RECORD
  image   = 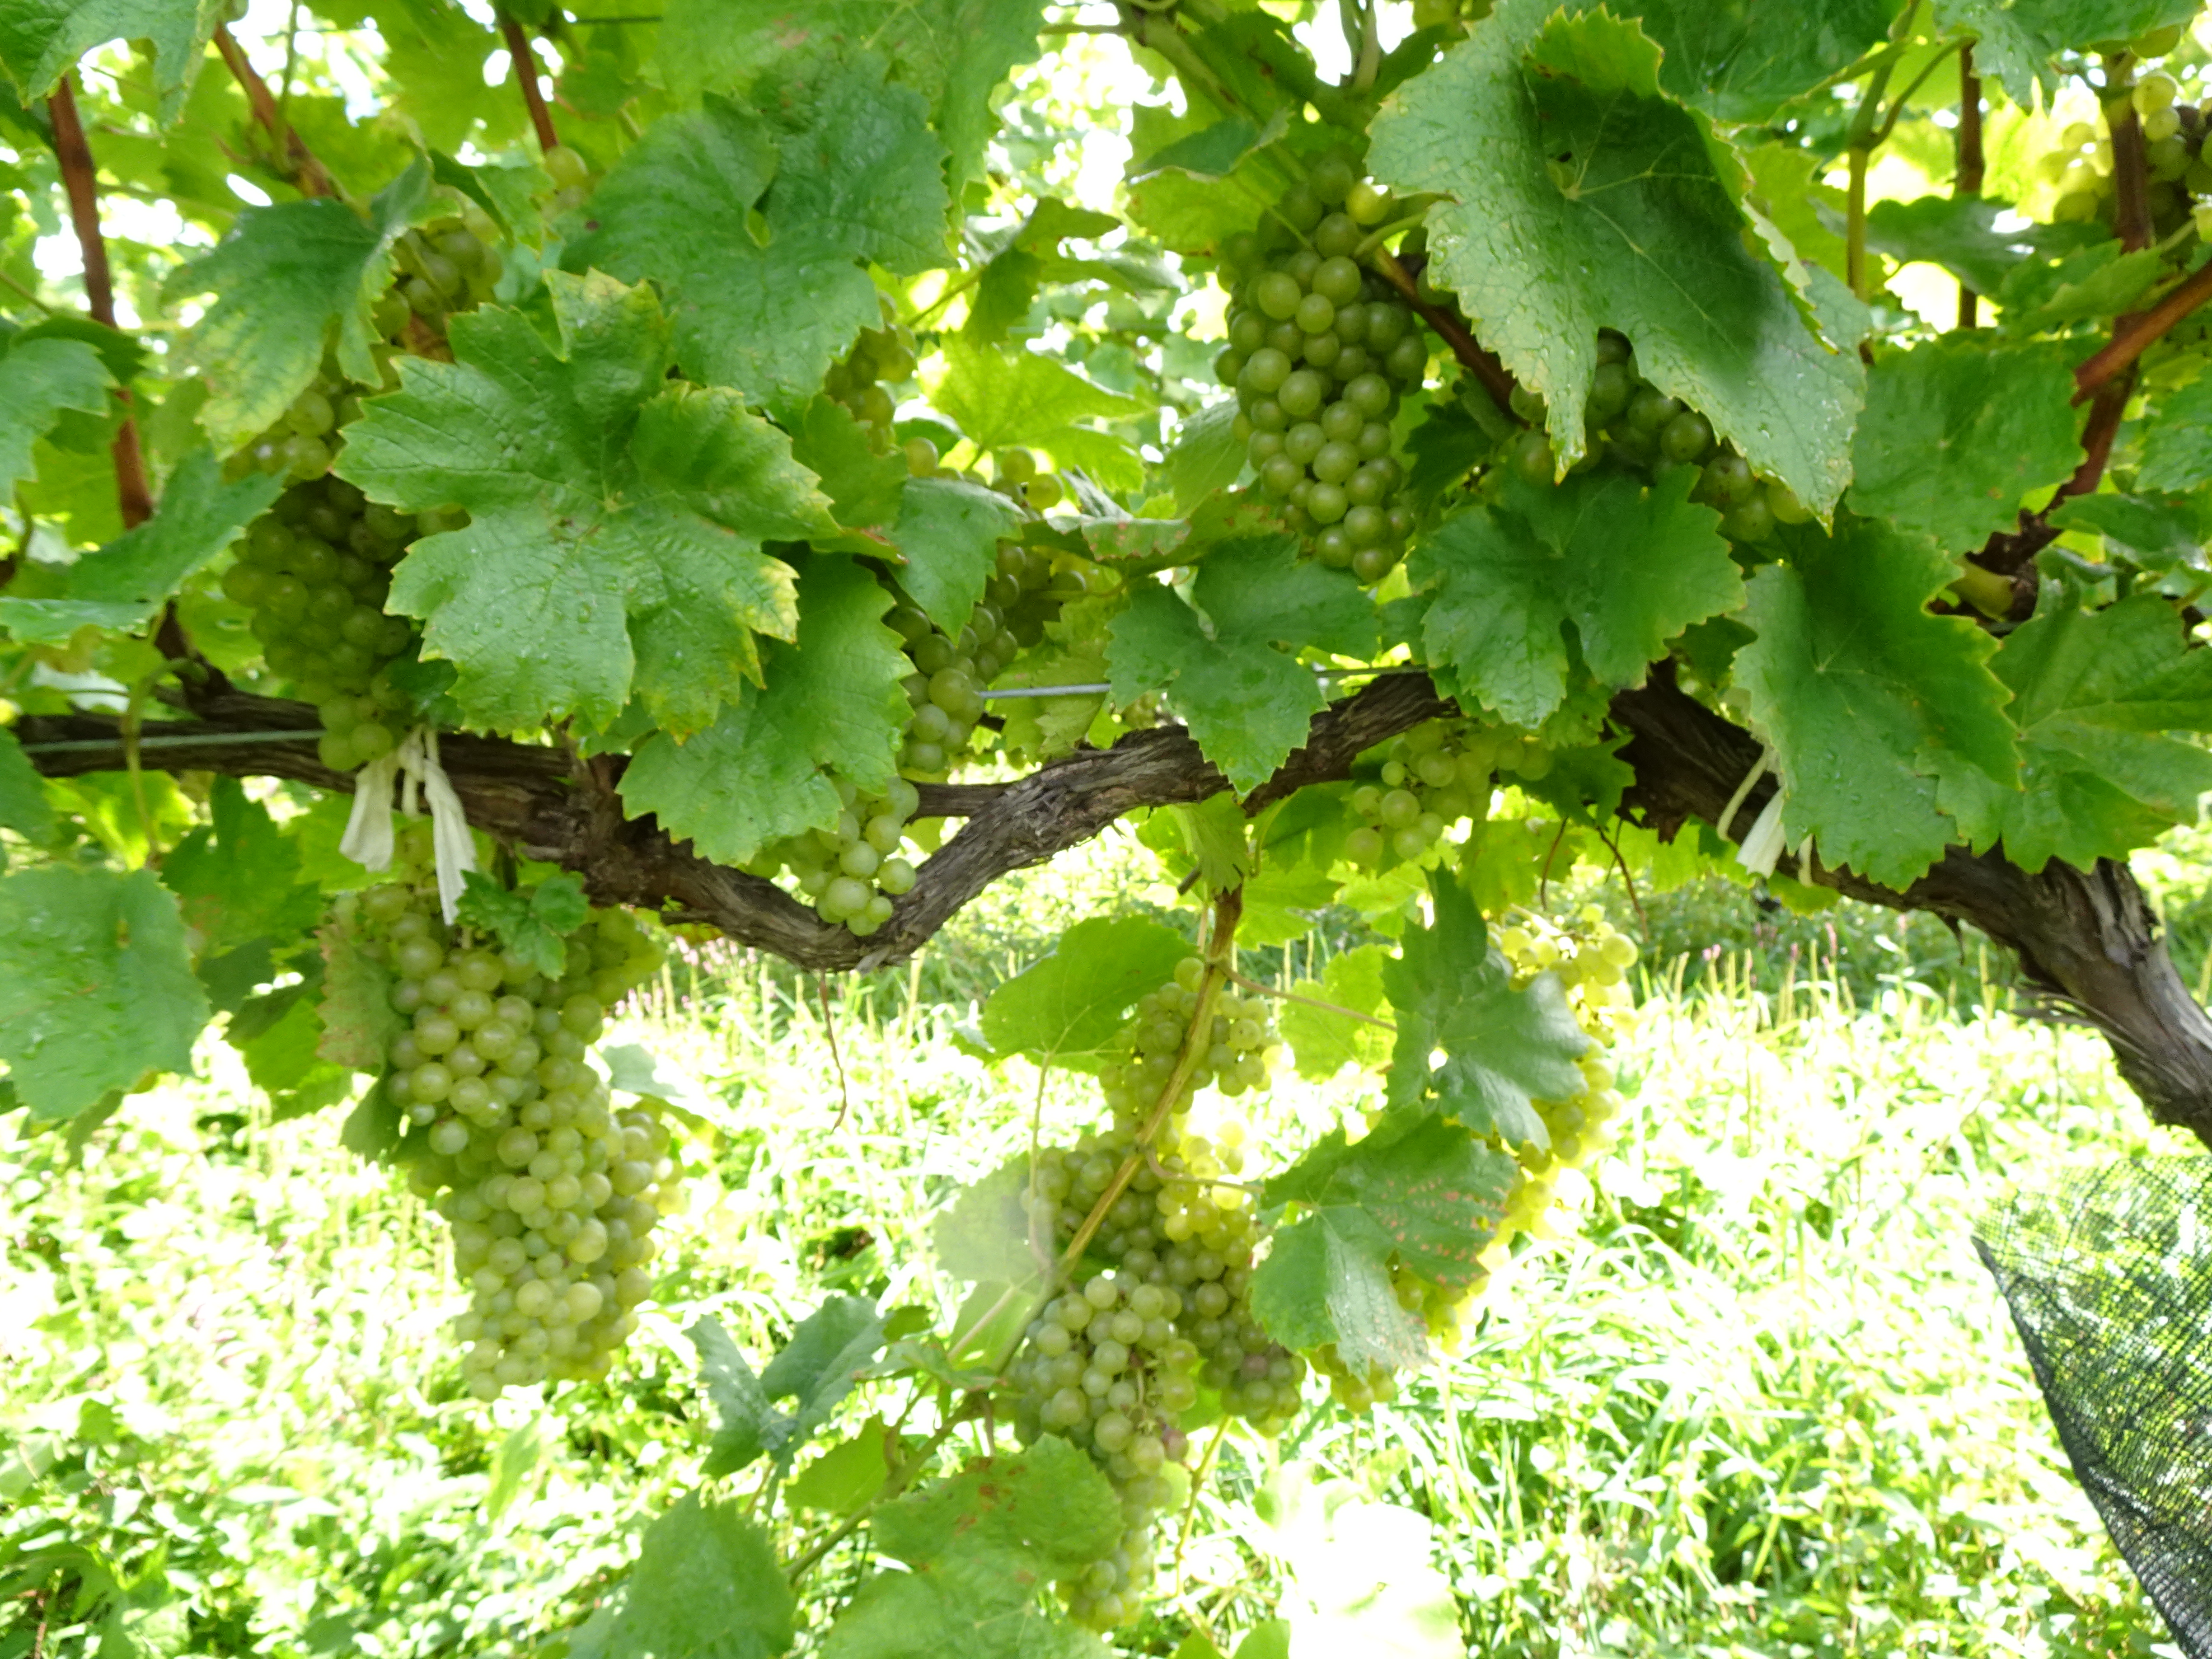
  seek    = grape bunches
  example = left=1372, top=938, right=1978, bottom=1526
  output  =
left=1015, top=1275, right=1200, bottom=1481
left=1311, top=1265, right=1490, bottom=1414
left=1035, top=1129, right=1187, bottom=1264
left=883, top=438, right=1083, bottom=772
left=2070, top=16, right=2197, bottom=59
left=358, top=879, right=635, bottom=1167
left=1344, top=719, right=1554, bottom=866
left=1214, top=156, right=1426, bottom=580
left=1124, top=1157, right=1305, bottom=1436
left=740, top=778, right=919, bottom=937
left=544, top=145, right=588, bottom=195
left=2044, top=71, right=2212, bottom=224
left=1056, top=1465, right=1174, bottom=1627
left=408, top=1064, right=627, bottom=1404
left=1483, top=903, right=1641, bottom=1172
left=824, top=299, right=918, bottom=459
left=218, top=479, right=469, bottom=773
left=224, top=287, right=411, bottom=480
left=393, top=216, right=495, bottom=335
left=1510, top=332, right=1817, bottom=541
left=1099, top=959, right=1271, bottom=1142
left=578, top=1114, right=671, bottom=1383
left=1406, top=193, right=1472, bottom=327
